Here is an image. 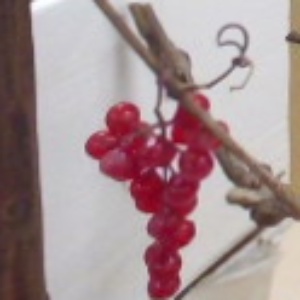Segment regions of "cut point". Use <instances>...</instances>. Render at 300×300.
<instances>
[{
	"label": "cut point",
	"instance_id": "cut-point-1",
	"mask_svg": "<svg viewBox=\"0 0 300 300\" xmlns=\"http://www.w3.org/2000/svg\"><path fill=\"white\" fill-rule=\"evenodd\" d=\"M155 86V102L153 103V114L158 118V122L149 125V128L165 126L171 124V120L165 119V115L160 111V106L162 105V83L159 79L154 81Z\"/></svg>",
	"mask_w": 300,
	"mask_h": 300
}]
</instances>
